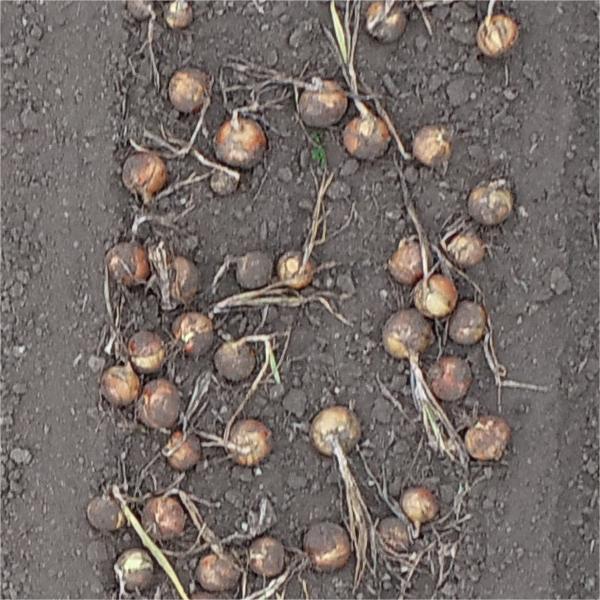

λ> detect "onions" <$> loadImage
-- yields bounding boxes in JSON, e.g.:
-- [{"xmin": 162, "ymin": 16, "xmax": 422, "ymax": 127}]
[
  {"xmin": 85, "ymin": 493, "xmax": 120, "ymax": 531},
  {"xmin": 215, "ymin": 115, "xmax": 264, "ymax": 164},
  {"xmin": 195, "ymin": 552, "xmax": 236, "ymax": 592},
  {"xmin": 474, "ymin": 17, "xmax": 518, "ymax": 55},
  {"xmin": 134, "ymin": 381, "xmax": 181, "ymax": 427},
  {"xmin": 215, "ymin": 342, "xmax": 253, "ymax": 381},
  {"xmin": 128, "ymin": 328, "xmax": 167, "ymax": 371},
  {"xmin": 444, "ymin": 228, "xmax": 484, "ymax": 266},
  {"xmin": 465, "ymin": 417, "xmax": 509, "ymax": 461},
  {"xmin": 121, "ymin": 151, "xmax": 168, "ymax": 194},
  {"xmin": 163, "ymin": 0, "xmax": 191, "ymax": 28},
  {"xmin": 429, "ymin": 354, "xmax": 471, "ymax": 399},
  {"xmin": 167, "ymin": 66, "xmax": 209, "ymax": 110},
  {"xmin": 367, "ymin": 5, "xmax": 405, "ymax": 40},
  {"xmin": 174, "ymin": 311, "xmax": 214, "ymax": 354},
  {"xmin": 376, "ymin": 517, "xmax": 410, "ymax": 552},
  {"xmin": 209, "ymin": 167, "xmax": 236, "ymax": 194},
  {"xmin": 144, "ymin": 497, "xmax": 185, "ymax": 538},
  {"xmin": 277, "ymin": 251, "xmax": 313, "ymax": 287},
  {"xmin": 166, "ymin": 258, "xmax": 201, "ymax": 299},
  {"xmin": 100, "ymin": 364, "xmax": 140, "ymax": 405},
  {"xmin": 388, "ymin": 240, "xmax": 428, "ymax": 283},
  {"xmin": 411, "ymin": 125, "xmax": 450, "ymax": 166},
  {"xmin": 113, "ymin": 547, "xmax": 155, "ymax": 585},
  {"xmin": 125, "ymin": 0, "xmax": 152, "ymax": 23},
  {"xmin": 227, "ymin": 417, "xmax": 271, "ymax": 463},
  {"xmin": 340, "ymin": 107, "xmax": 389, "ymax": 157},
  {"xmin": 163, "ymin": 432, "xmax": 199, "ymax": 469},
  {"xmin": 107, "ymin": 244, "xmax": 149, "ymax": 283},
  {"xmin": 382, "ymin": 310, "xmax": 434, "ymax": 355},
  {"xmin": 400, "ymin": 485, "xmax": 438, "ymax": 522},
  {"xmin": 246, "ymin": 536, "xmax": 283, "ymax": 575},
  {"xmin": 414, "ymin": 274, "xmax": 456, "ymax": 318},
  {"xmin": 447, "ymin": 304, "xmax": 486, "ymax": 343},
  {"xmin": 304, "ymin": 520, "xmax": 350, "ymax": 570},
  {"xmin": 299, "ymin": 80, "xmax": 345, "ymax": 127},
  {"xmin": 309, "ymin": 407, "xmax": 361, "ymax": 454},
  {"xmin": 466, "ymin": 180, "xmax": 513, "ymax": 224},
  {"xmin": 234, "ymin": 250, "xmax": 270, "ymax": 289}
]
